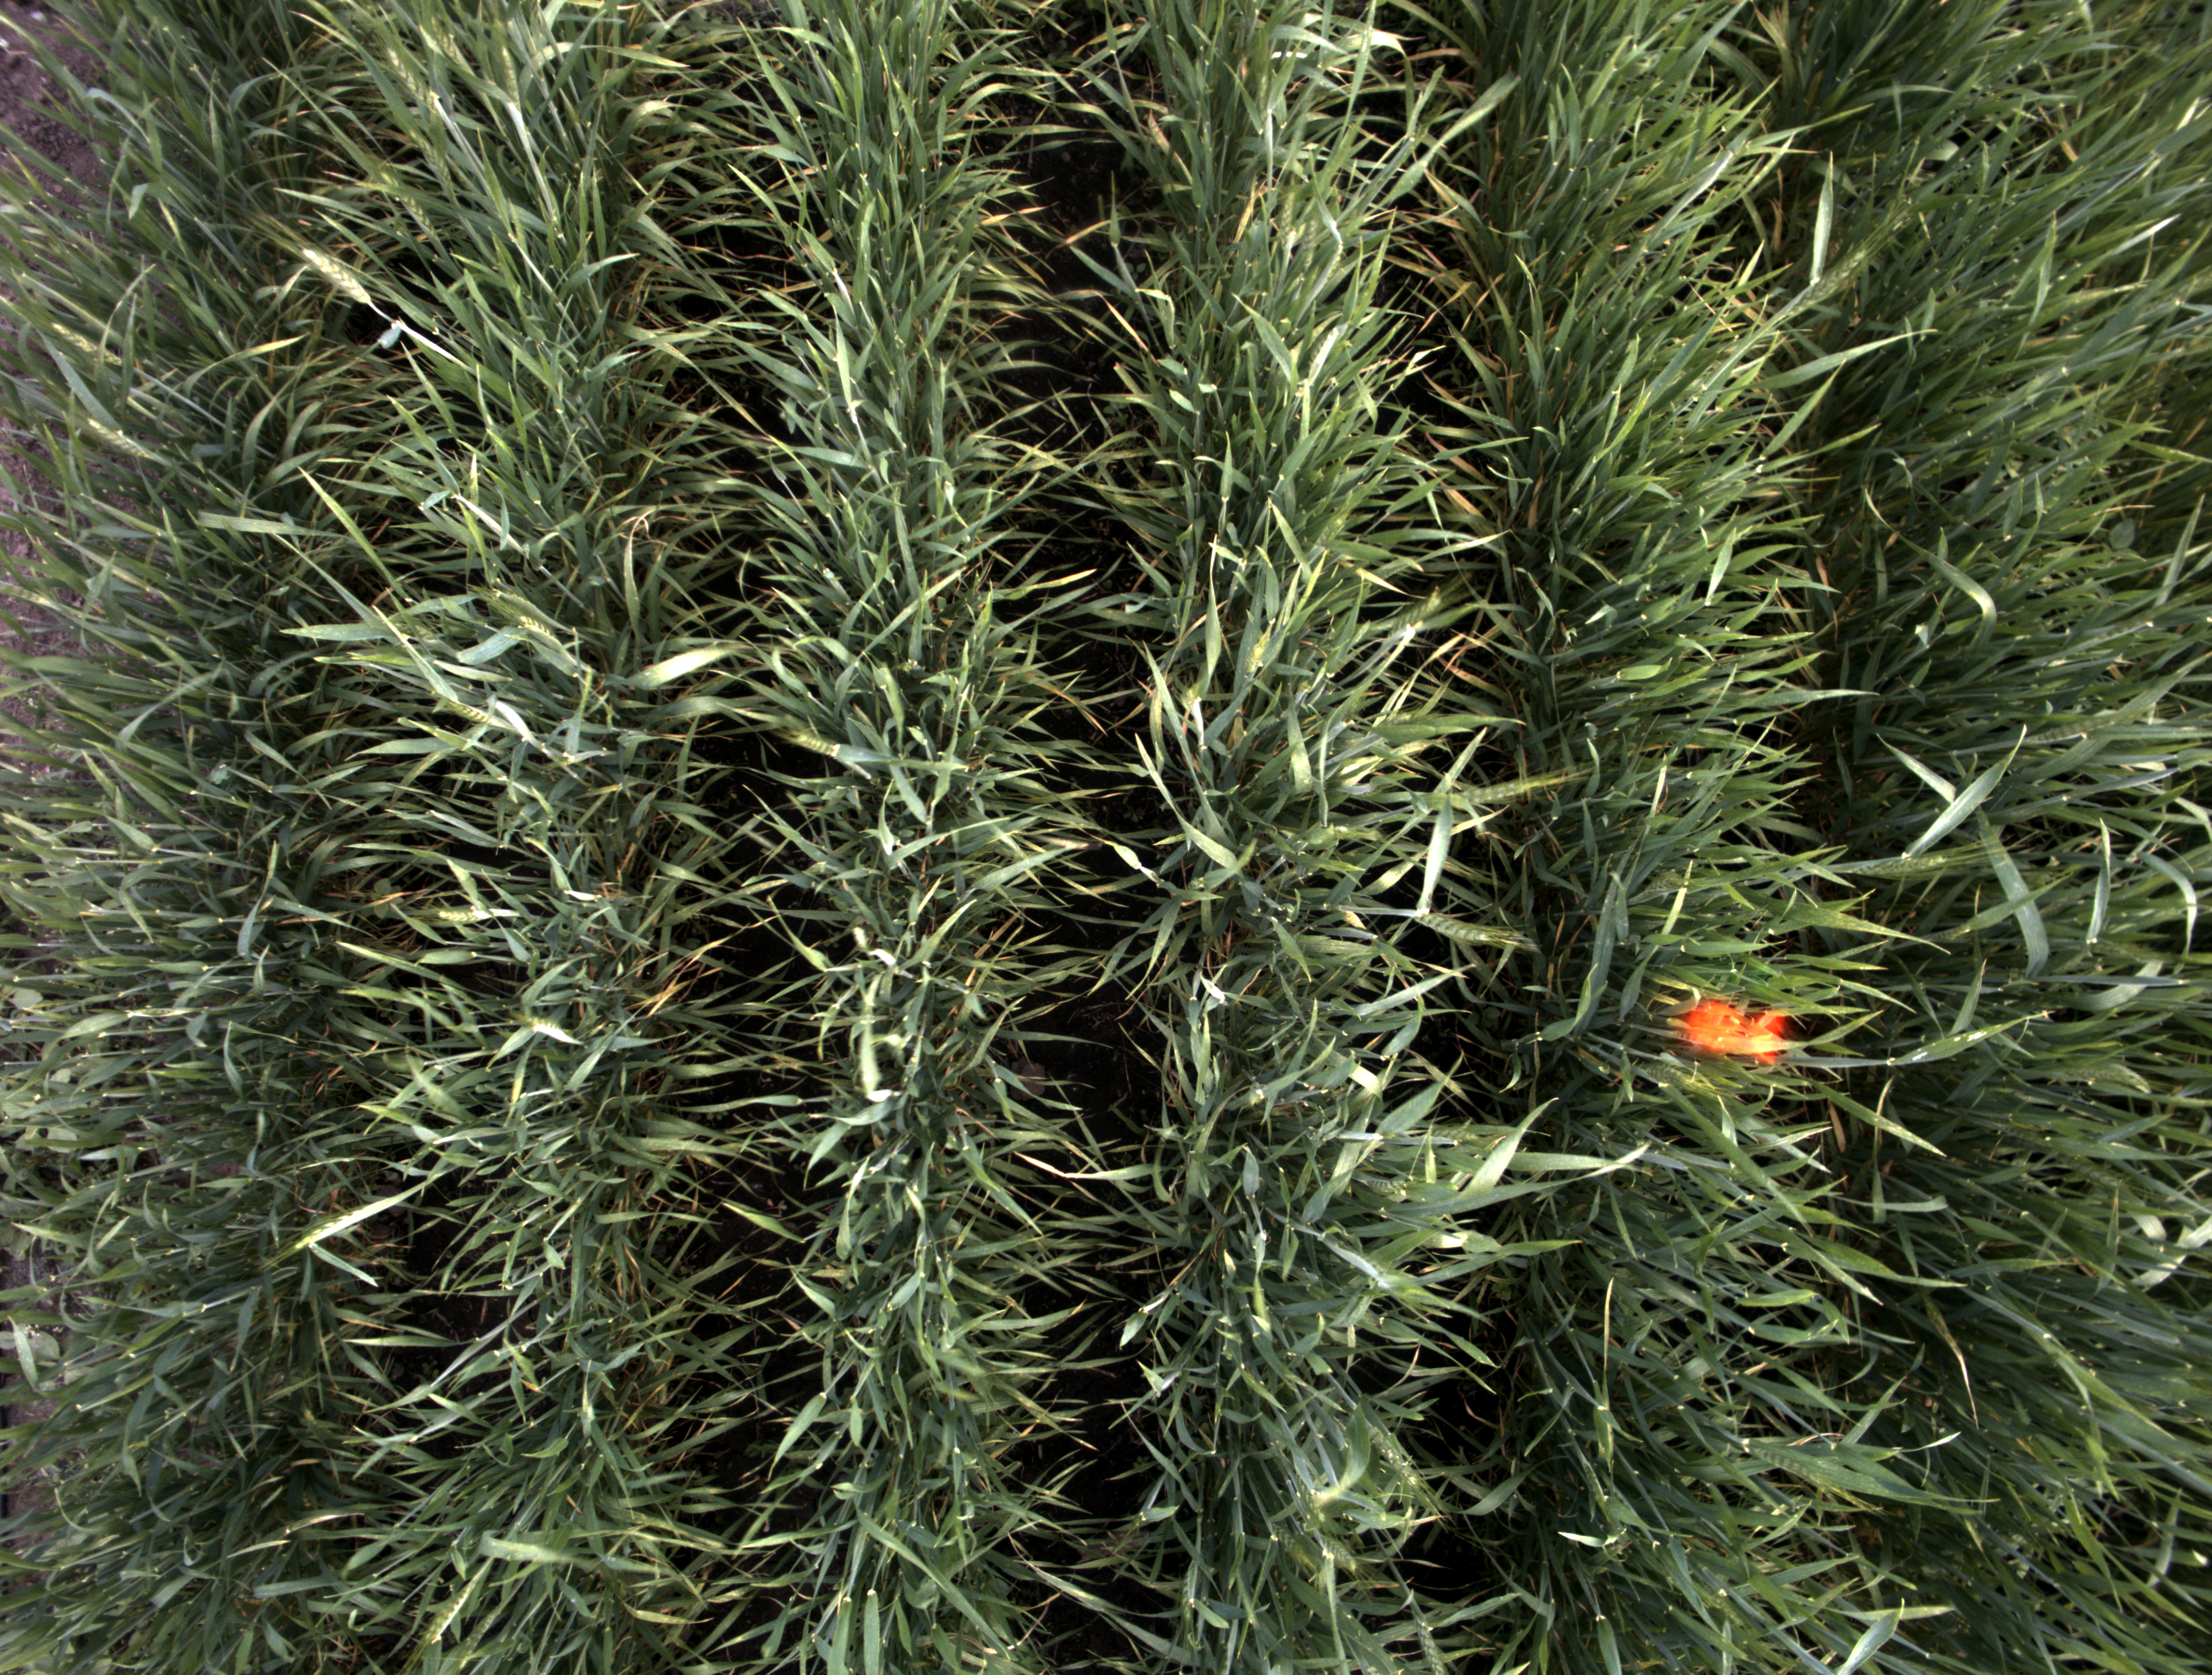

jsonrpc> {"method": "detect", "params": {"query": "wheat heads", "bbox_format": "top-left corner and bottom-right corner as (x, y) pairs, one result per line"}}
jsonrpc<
(1182, 1577), (1196, 1631)
(1272, 1527), (1309, 1561)
(1416, 908), (1500, 949)
(1854, 853), (1944, 881)
(1794, 246), (1870, 311)
(790, 729), (834, 758)
(450, 1616), (495, 1668)
(1295, 1468), (1320, 1514)
(1320, 516), (1346, 543)
(1364, 1419), (1417, 1483)
(1638, 1065), (1688, 1090)
(1433, 1127), (1470, 1139)
(1300, 222), (1318, 273)
(383, 51), (418, 97)
(425, 1571), (475, 1636)
(1252, 74), (1267, 107)
(1319, 1532), (1355, 1569)
(418, 142), (455, 197)
(455, 698), (489, 719)
(1395, 594), (1443, 623)
(1461, 779), (1539, 802)
(1362, 1174), (1407, 1195)
(523, 1017), (558, 1029)
(1582, 1463), (1607, 1508)
(1418, 1627), (1445, 1672)
(517, 614), (557, 638)
(1644, 870), (1686, 888)
(298, 248), (370, 307)
(1747, 1448), (1825, 1491)
(500, 46), (522, 103)
(434, 908), (471, 922)
(1275, 193), (1291, 250)
(289, 1213), (348, 1242)
(400, 185), (436, 236)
